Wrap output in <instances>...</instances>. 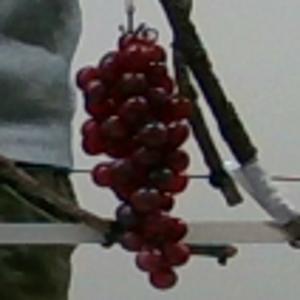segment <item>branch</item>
<instances>
[{
  "instance_id": "obj_1",
  "label": "branch",
  "mask_w": 300,
  "mask_h": 300,
  "mask_svg": "<svg viewBox=\"0 0 300 300\" xmlns=\"http://www.w3.org/2000/svg\"><path fill=\"white\" fill-rule=\"evenodd\" d=\"M193 2L157 1L172 31L168 47L173 79L177 84L175 94L187 96L191 102L193 118L189 125L202 165L208 170L207 183L212 190L220 192L228 208L244 204L245 197L238 185L241 186L272 218L262 220L261 224L280 233L284 238L282 241H286L290 248L300 250V212L279 195L278 189L268 180L267 172L260 166L258 147L214 72L208 48L191 18ZM197 88L235 163L225 162L206 120Z\"/></svg>"
},
{
  "instance_id": "obj_2",
  "label": "branch",
  "mask_w": 300,
  "mask_h": 300,
  "mask_svg": "<svg viewBox=\"0 0 300 300\" xmlns=\"http://www.w3.org/2000/svg\"><path fill=\"white\" fill-rule=\"evenodd\" d=\"M0 166L12 178L21 183L27 189L49 203L69 213L71 216L82 222L85 226L101 234L103 237L101 247L104 250H111L116 244L119 245L117 237L118 232L123 225L119 224L117 219L102 217L86 208H83L80 205H77L76 203L60 197L54 191L41 184L24 170L18 168L15 164L10 162L1 152Z\"/></svg>"
},
{
  "instance_id": "obj_3",
  "label": "branch",
  "mask_w": 300,
  "mask_h": 300,
  "mask_svg": "<svg viewBox=\"0 0 300 300\" xmlns=\"http://www.w3.org/2000/svg\"><path fill=\"white\" fill-rule=\"evenodd\" d=\"M190 256L216 259L219 267H227L228 260L237 257L239 247L227 242H182Z\"/></svg>"
}]
</instances>
